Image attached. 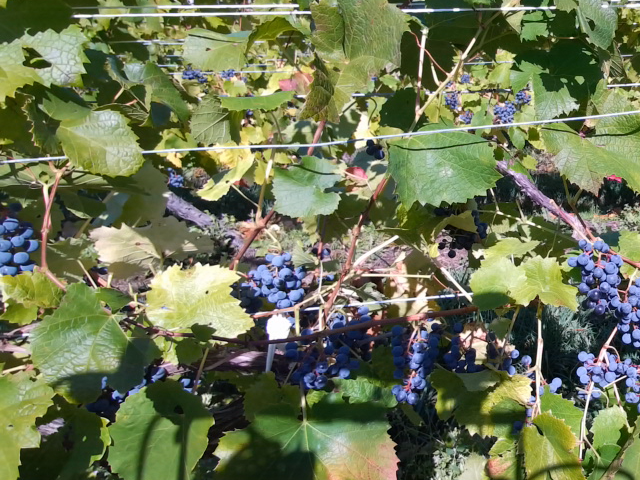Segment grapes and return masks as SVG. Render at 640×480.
<instances>
[{
  "label": "grapes",
  "mask_w": 640,
  "mask_h": 480,
  "mask_svg": "<svg viewBox=\"0 0 640 480\" xmlns=\"http://www.w3.org/2000/svg\"><path fill=\"white\" fill-rule=\"evenodd\" d=\"M371 334L369 329L364 327L361 331L344 332L341 340L347 346H340L336 350V344L328 341L323 347L326 355H331L335 350V359L337 363L328 364L325 360H320L321 349L313 346H300L298 343L287 344L284 349L286 358L290 360L300 359L301 362L294 370L293 379L301 382L306 389H314L323 391L328 386V378L324 375L336 376L337 378L348 379L352 372L360 369V363L357 360H349L350 349L356 341L361 339H369Z\"/></svg>",
  "instance_id": "grapes-3"
},
{
  "label": "grapes",
  "mask_w": 640,
  "mask_h": 480,
  "mask_svg": "<svg viewBox=\"0 0 640 480\" xmlns=\"http://www.w3.org/2000/svg\"><path fill=\"white\" fill-rule=\"evenodd\" d=\"M191 382H192V379L189 378V377H182L180 379V383L182 384L184 392H186V393H192L193 392V388L192 387H188Z\"/></svg>",
  "instance_id": "grapes-15"
},
{
  "label": "grapes",
  "mask_w": 640,
  "mask_h": 480,
  "mask_svg": "<svg viewBox=\"0 0 640 480\" xmlns=\"http://www.w3.org/2000/svg\"><path fill=\"white\" fill-rule=\"evenodd\" d=\"M450 353H444L445 368L448 371L455 369L456 373L477 372L485 369L484 365L475 364L476 349L470 348L466 352V361H458L462 354L459 353L460 338L451 337Z\"/></svg>",
  "instance_id": "grapes-7"
},
{
  "label": "grapes",
  "mask_w": 640,
  "mask_h": 480,
  "mask_svg": "<svg viewBox=\"0 0 640 480\" xmlns=\"http://www.w3.org/2000/svg\"><path fill=\"white\" fill-rule=\"evenodd\" d=\"M168 180L169 183L172 187L174 188H180L184 185V177L182 175H177L174 174V168L173 167H169L168 168Z\"/></svg>",
  "instance_id": "grapes-13"
},
{
  "label": "grapes",
  "mask_w": 640,
  "mask_h": 480,
  "mask_svg": "<svg viewBox=\"0 0 640 480\" xmlns=\"http://www.w3.org/2000/svg\"><path fill=\"white\" fill-rule=\"evenodd\" d=\"M608 367L595 364L596 355L586 350H581L578 354V361L583 366L576 368V374L580 377L582 384H588L590 380L597 382L599 386H607L614 381H618L622 376H626L624 401L627 404H636L640 401V375L633 366L631 359H625L622 363L614 351L606 353Z\"/></svg>",
  "instance_id": "grapes-6"
},
{
  "label": "grapes",
  "mask_w": 640,
  "mask_h": 480,
  "mask_svg": "<svg viewBox=\"0 0 640 480\" xmlns=\"http://www.w3.org/2000/svg\"><path fill=\"white\" fill-rule=\"evenodd\" d=\"M362 320H371V315L369 314V309L366 306L358 307L353 314H344L333 313L329 317V326L337 327L345 324H354L358 323Z\"/></svg>",
  "instance_id": "grapes-9"
},
{
  "label": "grapes",
  "mask_w": 640,
  "mask_h": 480,
  "mask_svg": "<svg viewBox=\"0 0 640 480\" xmlns=\"http://www.w3.org/2000/svg\"><path fill=\"white\" fill-rule=\"evenodd\" d=\"M515 101H506L505 107H499L495 105L493 108V113L498 116V119L502 123H511L513 121V115L516 111V107L520 106L522 102L525 104L531 103V96L527 95L524 91H520L514 95Z\"/></svg>",
  "instance_id": "grapes-8"
},
{
  "label": "grapes",
  "mask_w": 640,
  "mask_h": 480,
  "mask_svg": "<svg viewBox=\"0 0 640 480\" xmlns=\"http://www.w3.org/2000/svg\"><path fill=\"white\" fill-rule=\"evenodd\" d=\"M291 255L282 252L280 255L268 253L265 261L273 267H280L276 273L269 270L266 265H259L248 272L250 281L234 283L231 295L240 298V306L250 312L262 306L265 298L269 304H274L278 309L288 308L304 297L305 289L302 280L306 277V269L303 266L292 268L288 263Z\"/></svg>",
  "instance_id": "grapes-2"
},
{
  "label": "grapes",
  "mask_w": 640,
  "mask_h": 480,
  "mask_svg": "<svg viewBox=\"0 0 640 480\" xmlns=\"http://www.w3.org/2000/svg\"><path fill=\"white\" fill-rule=\"evenodd\" d=\"M391 394L398 402L407 401L409 405H416L419 401V395L410 389H404L401 385H394L391 388Z\"/></svg>",
  "instance_id": "grapes-11"
},
{
  "label": "grapes",
  "mask_w": 640,
  "mask_h": 480,
  "mask_svg": "<svg viewBox=\"0 0 640 480\" xmlns=\"http://www.w3.org/2000/svg\"><path fill=\"white\" fill-rule=\"evenodd\" d=\"M371 342L366 340L362 343V347L360 349L361 359L363 361H370L372 359V353L369 351Z\"/></svg>",
  "instance_id": "grapes-14"
},
{
  "label": "grapes",
  "mask_w": 640,
  "mask_h": 480,
  "mask_svg": "<svg viewBox=\"0 0 640 480\" xmlns=\"http://www.w3.org/2000/svg\"><path fill=\"white\" fill-rule=\"evenodd\" d=\"M433 332L428 333L426 329L421 331V337L427 341V343L415 342L413 344V354H402L406 350V336L404 333V327L401 324H396L392 327L391 346L392 355L394 356V365L397 368L393 372L395 379H402L404 377L403 369L407 367L409 370L419 369L418 374L411 379L410 388L412 390H425L428 387V380L426 379L430 372L435 370L433 359H437L440 356V352L437 348L440 335L443 333L442 325L439 322H434L431 325Z\"/></svg>",
  "instance_id": "grapes-4"
},
{
  "label": "grapes",
  "mask_w": 640,
  "mask_h": 480,
  "mask_svg": "<svg viewBox=\"0 0 640 480\" xmlns=\"http://www.w3.org/2000/svg\"><path fill=\"white\" fill-rule=\"evenodd\" d=\"M519 357V351L517 349H512L509 352V357H505L501 363V369L506 371L509 375H514L516 373V368L511 365L512 359H517Z\"/></svg>",
  "instance_id": "grapes-12"
},
{
  "label": "grapes",
  "mask_w": 640,
  "mask_h": 480,
  "mask_svg": "<svg viewBox=\"0 0 640 480\" xmlns=\"http://www.w3.org/2000/svg\"><path fill=\"white\" fill-rule=\"evenodd\" d=\"M35 230L30 222H21L16 217L0 220V274L16 276L30 272L36 263L30 261V254L39 249V242L30 239Z\"/></svg>",
  "instance_id": "grapes-5"
},
{
  "label": "grapes",
  "mask_w": 640,
  "mask_h": 480,
  "mask_svg": "<svg viewBox=\"0 0 640 480\" xmlns=\"http://www.w3.org/2000/svg\"><path fill=\"white\" fill-rule=\"evenodd\" d=\"M578 247L582 249L578 256H571L567 259L570 267L582 265V283L579 285V292L587 295L586 308L593 311L595 315H605L613 309L614 316L618 319L617 329L622 335L624 344H631L635 348H640V329L632 331L631 325L640 322V277L635 278V285H631L625 301H620L618 286L621 277L617 275L622 262L615 256H610V262L601 261L600 266H595L592 256L588 254L592 249V244L585 240L578 242Z\"/></svg>",
  "instance_id": "grapes-1"
},
{
  "label": "grapes",
  "mask_w": 640,
  "mask_h": 480,
  "mask_svg": "<svg viewBox=\"0 0 640 480\" xmlns=\"http://www.w3.org/2000/svg\"><path fill=\"white\" fill-rule=\"evenodd\" d=\"M151 375L152 376L150 378L141 380L138 386H134L132 389L128 390L127 393H124L123 395L120 394V392L117 389H114L112 391V399L116 400L117 402H122L128 397L134 396L139 391H141L147 384H150L152 382H157L158 380H160L165 375V370L162 369L161 367H154L151 370Z\"/></svg>",
  "instance_id": "grapes-10"
}]
</instances>
